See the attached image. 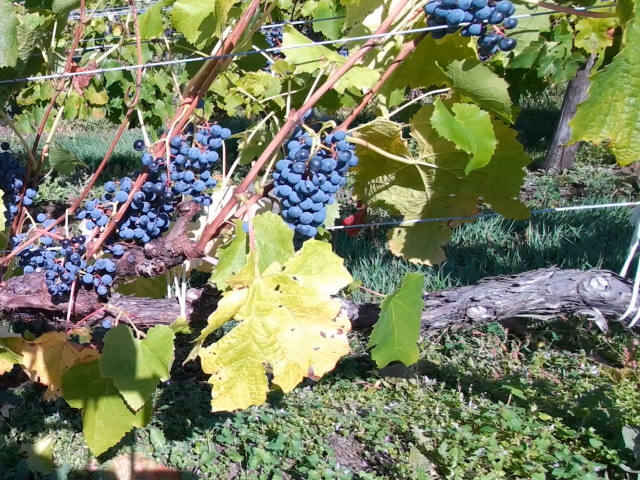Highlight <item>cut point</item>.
<instances>
[{"label":"cut point","mask_w":640,"mask_h":480,"mask_svg":"<svg viewBox=\"0 0 640 480\" xmlns=\"http://www.w3.org/2000/svg\"><path fill=\"white\" fill-rule=\"evenodd\" d=\"M189 108V105H186L185 107H183L182 113L180 114V116L176 119L175 123L173 124V126L171 127L170 131L168 132L167 138H166V151H169V137L171 135V131H173L174 127L176 126V124L180 121V119L182 118V116L186 113V110Z\"/></svg>","instance_id":"7d7e1d6f"},{"label":"cut point","mask_w":640,"mask_h":480,"mask_svg":"<svg viewBox=\"0 0 640 480\" xmlns=\"http://www.w3.org/2000/svg\"><path fill=\"white\" fill-rule=\"evenodd\" d=\"M298 124L300 125V127H301L304 131H306V132H308V133H310V134H311V136H312V138H313V148H314V149H317L318 147H319V148H323V147H324V144H323L322 142H319V137H318V135L316 134V132H315L311 127L307 126V125L304 123V121H303L302 119H300V121L298 122Z\"/></svg>","instance_id":"6a23745f"}]
</instances>
